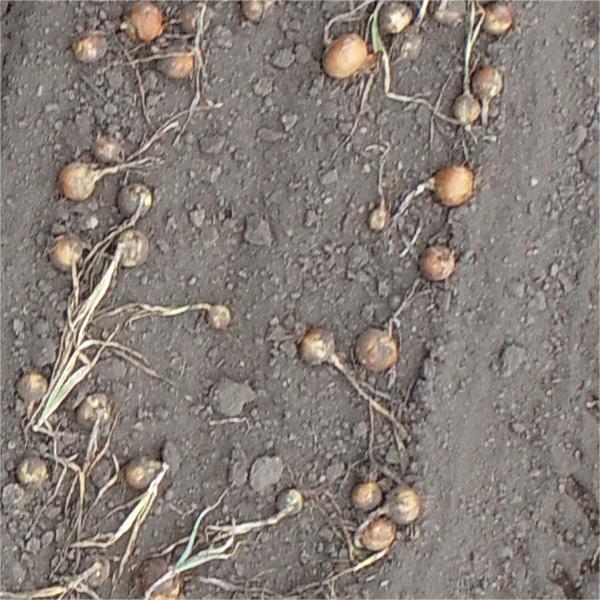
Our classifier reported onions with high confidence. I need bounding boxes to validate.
[451,95,480,123]
[47,234,82,268]
[118,185,151,219]
[298,326,333,363]
[365,204,389,231]
[147,565,184,598]
[124,459,157,491]
[183,5,212,32]
[481,3,515,32]
[15,456,46,486]
[57,162,100,199]
[352,479,381,509]
[73,32,104,60]
[275,488,302,517]
[124,3,164,42]
[239,0,265,23]
[205,303,229,328]
[82,555,109,584]
[162,50,194,79]
[89,456,117,485]
[384,483,419,522]
[432,164,472,204]
[379,5,411,36]
[13,369,48,407]
[351,326,397,369]
[323,33,371,77]
[417,245,453,281]
[468,67,502,102]
[356,514,393,551]
[75,394,111,428]
[92,131,121,160]
[396,31,422,57]
[437,1,463,24]
[112,230,149,268]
